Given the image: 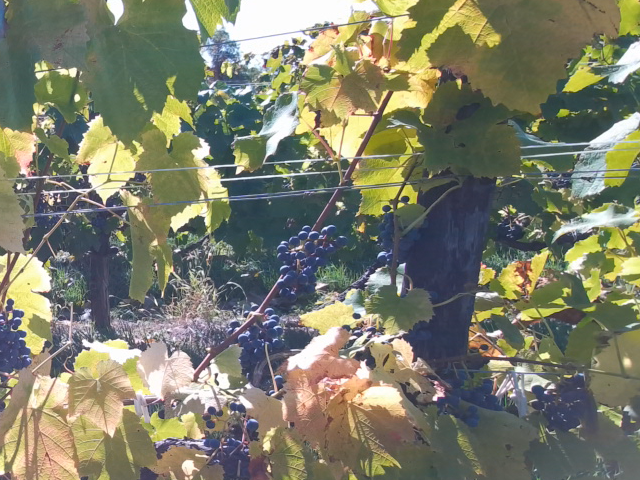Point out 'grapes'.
<instances>
[{
    "label": "grapes",
    "mask_w": 640,
    "mask_h": 480,
    "mask_svg": "<svg viewBox=\"0 0 640 480\" xmlns=\"http://www.w3.org/2000/svg\"><path fill=\"white\" fill-rule=\"evenodd\" d=\"M319 237L320 233L317 230H312L310 224H304L296 236L292 235L288 241L283 240L279 243L277 259L283 262L279 273L284 276L276 282V287L279 289V296L282 299L288 298L290 302H295L302 292L314 293L317 281L314 274L319 266L327 263L324 256L326 252L333 253L348 243V238L345 235H338L335 240L325 246L307 241L303 250L289 251L290 247H298L300 241H305L307 238L315 240Z\"/></svg>",
    "instance_id": "01657485"
},
{
    "label": "grapes",
    "mask_w": 640,
    "mask_h": 480,
    "mask_svg": "<svg viewBox=\"0 0 640 480\" xmlns=\"http://www.w3.org/2000/svg\"><path fill=\"white\" fill-rule=\"evenodd\" d=\"M14 300L9 298L6 301L5 310L12 311V319H8L4 312H0V371L12 374L14 369L21 370L32 364V359L28 357L32 350L27 347L24 340L26 332L19 330L22 324L24 312L14 309Z\"/></svg>",
    "instance_id": "b958b902"
},
{
    "label": "grapes",
    "mask_w": 640,
    "mask_h": 480,
    "mask_svg": "<svg viewBox=\"0 0 640 480\" xmlns=\"http://www.w3.org/2000/svg\"><path fill=\"white\" fill-rule=\"evenodd\" d=\"M460 376L458 379H448L447 383L453 387L452 390L449 391L448 396L440 397L437 401L438 406L436 410L441 412L443 410L442 406L446 404H450L453 408H456L460 403V398L471 405L468 407L469 416H465L463 418V422L468 424L470 427L476 428L480 421V416L478 413V408L487 409L489 411L501 412L503 407L496 403L497 397L492 394L493 382L490 379H484L481 382V387L470 388L468 391L461 388L464 385V380L466 379V374L464 372L457 373Z\"/></svg>",
    "instance_id": "0513c4c2"
},
{
    "label": "grapes",
    "mask_w": 640,
    "mask_h": 480,
    "mask_svg": "<svg viewBox=\"0 0 640 480\" xmlns=\"http://www.w3.org/2000/svg\"><path fill=\"white\" fill-rule=\"evenodd\" d=\"M264 315L267 319L260 323L264 330L252 326L237 338V342L243 347L239 357L243 367L256 364L265 358L266 343L272 348H281L283 345V340L278 338L283 334V329L276 325L280 322V317L272 307L266 308Z\"/></svg>",
    "instance_id": "84f90ec7"
},
{
    "label": "grapes",
    "mask_w": 640,
    "mask_h": 480,
    "mask_svg": "<svg viewBox=\"0 0 640 480\" xmlns=\"http://www.w3.org/2000/svg\"><path fill=\"white\" fill-rule=\"evenodd\" d=\"M531 392L538 400L532 403V407L543 412L551 428L569 431L571 428H577L580 425L579 419L586 415V407L583 403L574 402L571 407L567 404L556 405L554 397L545 394L543 385H534Z\"/></svg>",
    "instance_id": "f8a65327"
},
{
    "label": "grapes",
    "mask_w": 640,
    "mask_h": 480,
    "mask_svg": "<svg viewBox=\"0 0 640 480\" xmlns=\"http://www.w3.org/2000/svg\"><path fill=\"white\" fill-rule=\"evenodd\" d=\"M393 213H385L384 220L386 222H381L378 224V234L381 240V244L384 248V251H380L376 260L380 263H390L392 256V247L395 235V225L393 223Z\"/></svg>",
    "instance_id": "5460f4e3"
},
{
    "label": "grapes",
    "mask_w": 640,
    "mask_h": 480,
    "mask_svg": "<svg viewBox=\"0 0 640 480\" xmlns=\"http://www.w3.org/2000/svg\"><path fill=\"white\" fill-rule=\"evenodd\" d=\"M584 373H577L574 378L567 377L560 386L561 397L564 402H572L573 400H584L586 398V389L584 386Z\"/></svg>",
    "instance_id": "83cd7487"
},
{
    "label": "grapes",
    "mask_w": 640,
    "mask_h": 480,
    "mask_svg": "<svg viewBox=\"0 0 640 480\" xmlns=\"http://www.w3.org/2000/svg\"><path fill=\"white\" fill-rule=\"evenodd\" d=\"M418 232V228L411 229L406 234V237L401 238L398 263H405L410 257V248L414 246L416 244V241L421 238V234Z\"/></svg>",
    "instance_id": "e5b3c951"
},
{
    "label": "grapes",
    "mask_w": 640,
    "mask_h": 480,
    "mask_svg": "<svg viewBox=\"0 0 640 480\" xmlns=\"http://www.w3.org/2000/svg\"><path fill=\"white\" fill-rule=\"evenodd\" d=\"M223 414H224V411L222 409H219L216 411V408L214 406H210L207 408V412L203 413L202 419L206 421V427L209 428L210 430H213L214 427L216 426V422L214 420H210L211 415L213 417H222Z\"/></svg>",
    "instance_id": "2adb6a1f"
},
{
    "label": "grapes",
    "mask_w": 640,
    "mask_h": 480,
    "mask_svg": "<svg viewBox=\"0 0 640 480\" xmlns=\"http://www.w3.org/2000/svg\"><path fill=\"white\" fill-rule=\"evenodd\" d=\"M226 449L224 451L225 455L230 454L234 449L240 447L242 445V440L241 439H235L233 437H228L226 439Z\"/></svg>",
    "instance_id": "ef6de9ee"
},
{
    "label": "grapes",
    "mask_w": 640,
    "mask_h": 480,
    "mask_svg": "<svg viewBox=\"0 0 640 480\" xmlns=\"http://www.w3.org/2000/svg\"><path fill=\"white\" fill-rule=\"evenodd\" d=\"M230 329L228 330V334L232 335L235 333L236 329L241 327V324L238 321H232L228 323Z\"/></svg>",
    "instance_id": "1ff8f66d"
}]
</instances>
